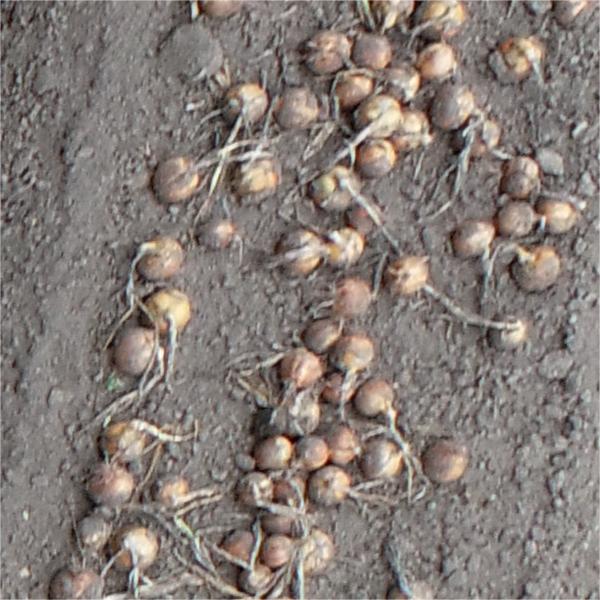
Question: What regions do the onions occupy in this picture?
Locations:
[380,64,417,100]
[108,323,156,376]
[356,139,393,176]
[90,462,133,505]
[253,434,292,469]
[138,236,183,279]
[118,529,159,578]
[304,316,339,351]
[48,567,99,599]
[452,219,493,258]
[374,0,411,31]
[360,436,403,477]
[495,36,543,79]
[552,1,592,26]
[325,227,364,265]
[269,469,306,503]
[101,419,143,461]
[421,437,466,482]
[395,108,432,147]
[142,289,193,332]
[224,82,267,123]
[498,201,536,239]
[333,334,373,373]
[539,196,579,232]
[352,380,393,417]
[200,220,236,248]
[156,153,202,202]
[282,350,322,387]
[295,532,333,572]
[324,373,356,404]
[220,528,252,565]
[159,475,190,503]
[277,226,323,273]
[413,0,465,34]
[501,158,540,199]
[295,434,330,470]
[241,472,275,505]
[355,93,401,136]
[477,119,501,146]
[496,312,530,348]
[431,84,475,128]
[323,423,360,462]
[416,44,454,80]
[317,170,356,210]
[277,88,319,130]
[196,0,239,22]
[306,29,347,72]
[308,465,351,507]
[512,244,560,289]
[239,562,267,593]
[385,252,428,295]
[259,534,290,568]
[351,203,378,230]
[78,508,114,549]
[261,508,304,537]
[281,391,322,431]
[331,277,370,317]
[239,157,277,196]
[352,31,390,69]
[333,70,375,107]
